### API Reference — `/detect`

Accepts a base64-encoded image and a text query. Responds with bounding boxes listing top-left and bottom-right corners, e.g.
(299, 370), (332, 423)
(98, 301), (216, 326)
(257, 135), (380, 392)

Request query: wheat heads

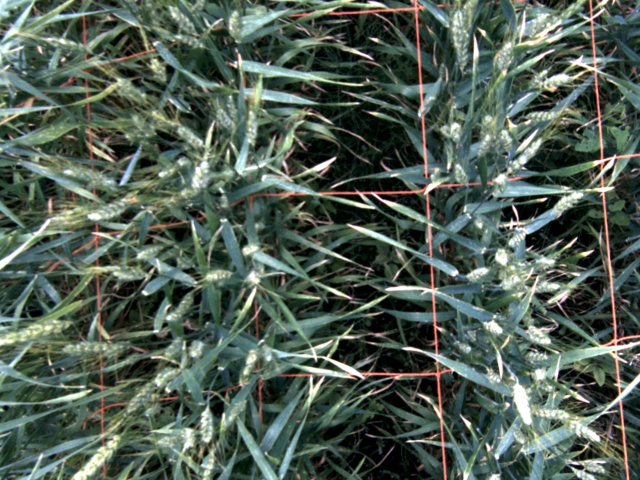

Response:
(495, 246), (508, 268)
(70, 438), (119, 480)
(452, 11), (469, 67)
(528, 369), (547, 382)
(147, 60), (168, 82)
(500, 128), (514, 146)
(201, 408), (214, 441)
(525, 353), (549, 363)
(483, 115), (495, 132)
(564, 418), (600, 444)
(570, 465), (596, 480)
(155, 369), (176, 387)
(476, 138), (492, 162)
(176, 129), (204, 148)
(246, 269), (264, 286)
(439, 120), (460, 142)
(527, 327), (552, 345)
(537, 258), (556, 272)
(244, 241), (260, 258)
(215, 111), (236, 131)
(204, 270), (233, 281)
(531, 70), (547, 85)
(156, 438), (179, 448)
(125, 382), (152, 414)
(453, 167), (468, 185)
(501, 276), (522, 290)
(167, 296), (194, 323)
(496, 44), (513, 70)
(63, 342), (132, 355)
(202, 454), (218, 480)
(486, 373), (501, 386)
(509, 141), (542, 171)
(532, 281), (560, 295)
(5, 321), (73, 345)
(65, 163), (112, 186)
(139, 246), (162, 259)
(466, 266), (492, 282)
(530, 14), (549, 35)
(230, 13), (242, 41)
(49, 33), (90, 53)
(262, 342), (273, 362)
(482, 320), (504, 335)
(553, 194), (579, 214)
(91, 199), (132, 221)
(245, 112), (256, 144)
(192, 339), (203, 358)
(534, 405), (567, 420)
(511, 382), (533, 426)
(117, 78), (147, 105)
(227, 95), (240, 117)
(165, 336), (178, 358)
(191, 164), (212, 193)
(158, 162), (185, 179)
(169, 5), (201, 35)
(542, 73), (568, 91)
(580, 458), (606, 471)
(240, 352), (257, 379)
(172, 36), (207, 52)
(527, 111), (552, 121)
(508, 234), (527, 247)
